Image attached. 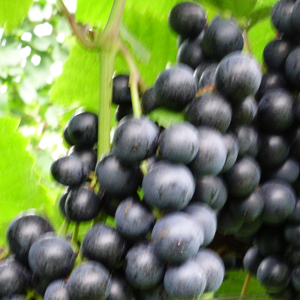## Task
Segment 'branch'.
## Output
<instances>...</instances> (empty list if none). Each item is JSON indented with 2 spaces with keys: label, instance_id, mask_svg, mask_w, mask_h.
Segmentation results:
<instances>
[{
  "label": "branch",
  "instance_id": "30e6481e",
  "mask_svg": "<svg viewBox=\"0 0 300 300\" xmlns=\"http://www.w3.org/2000/svg\"><path fill=\"white\" fill-rule=\"evenodd\" d=\"M126 6L125 0H114L100 37V88L97 161L110 152V106L112 101L113 55L116 52L115 38Z\"/></svg>",
  "mask_w": 300,
  "mask_h": 300
}]
</instances>
